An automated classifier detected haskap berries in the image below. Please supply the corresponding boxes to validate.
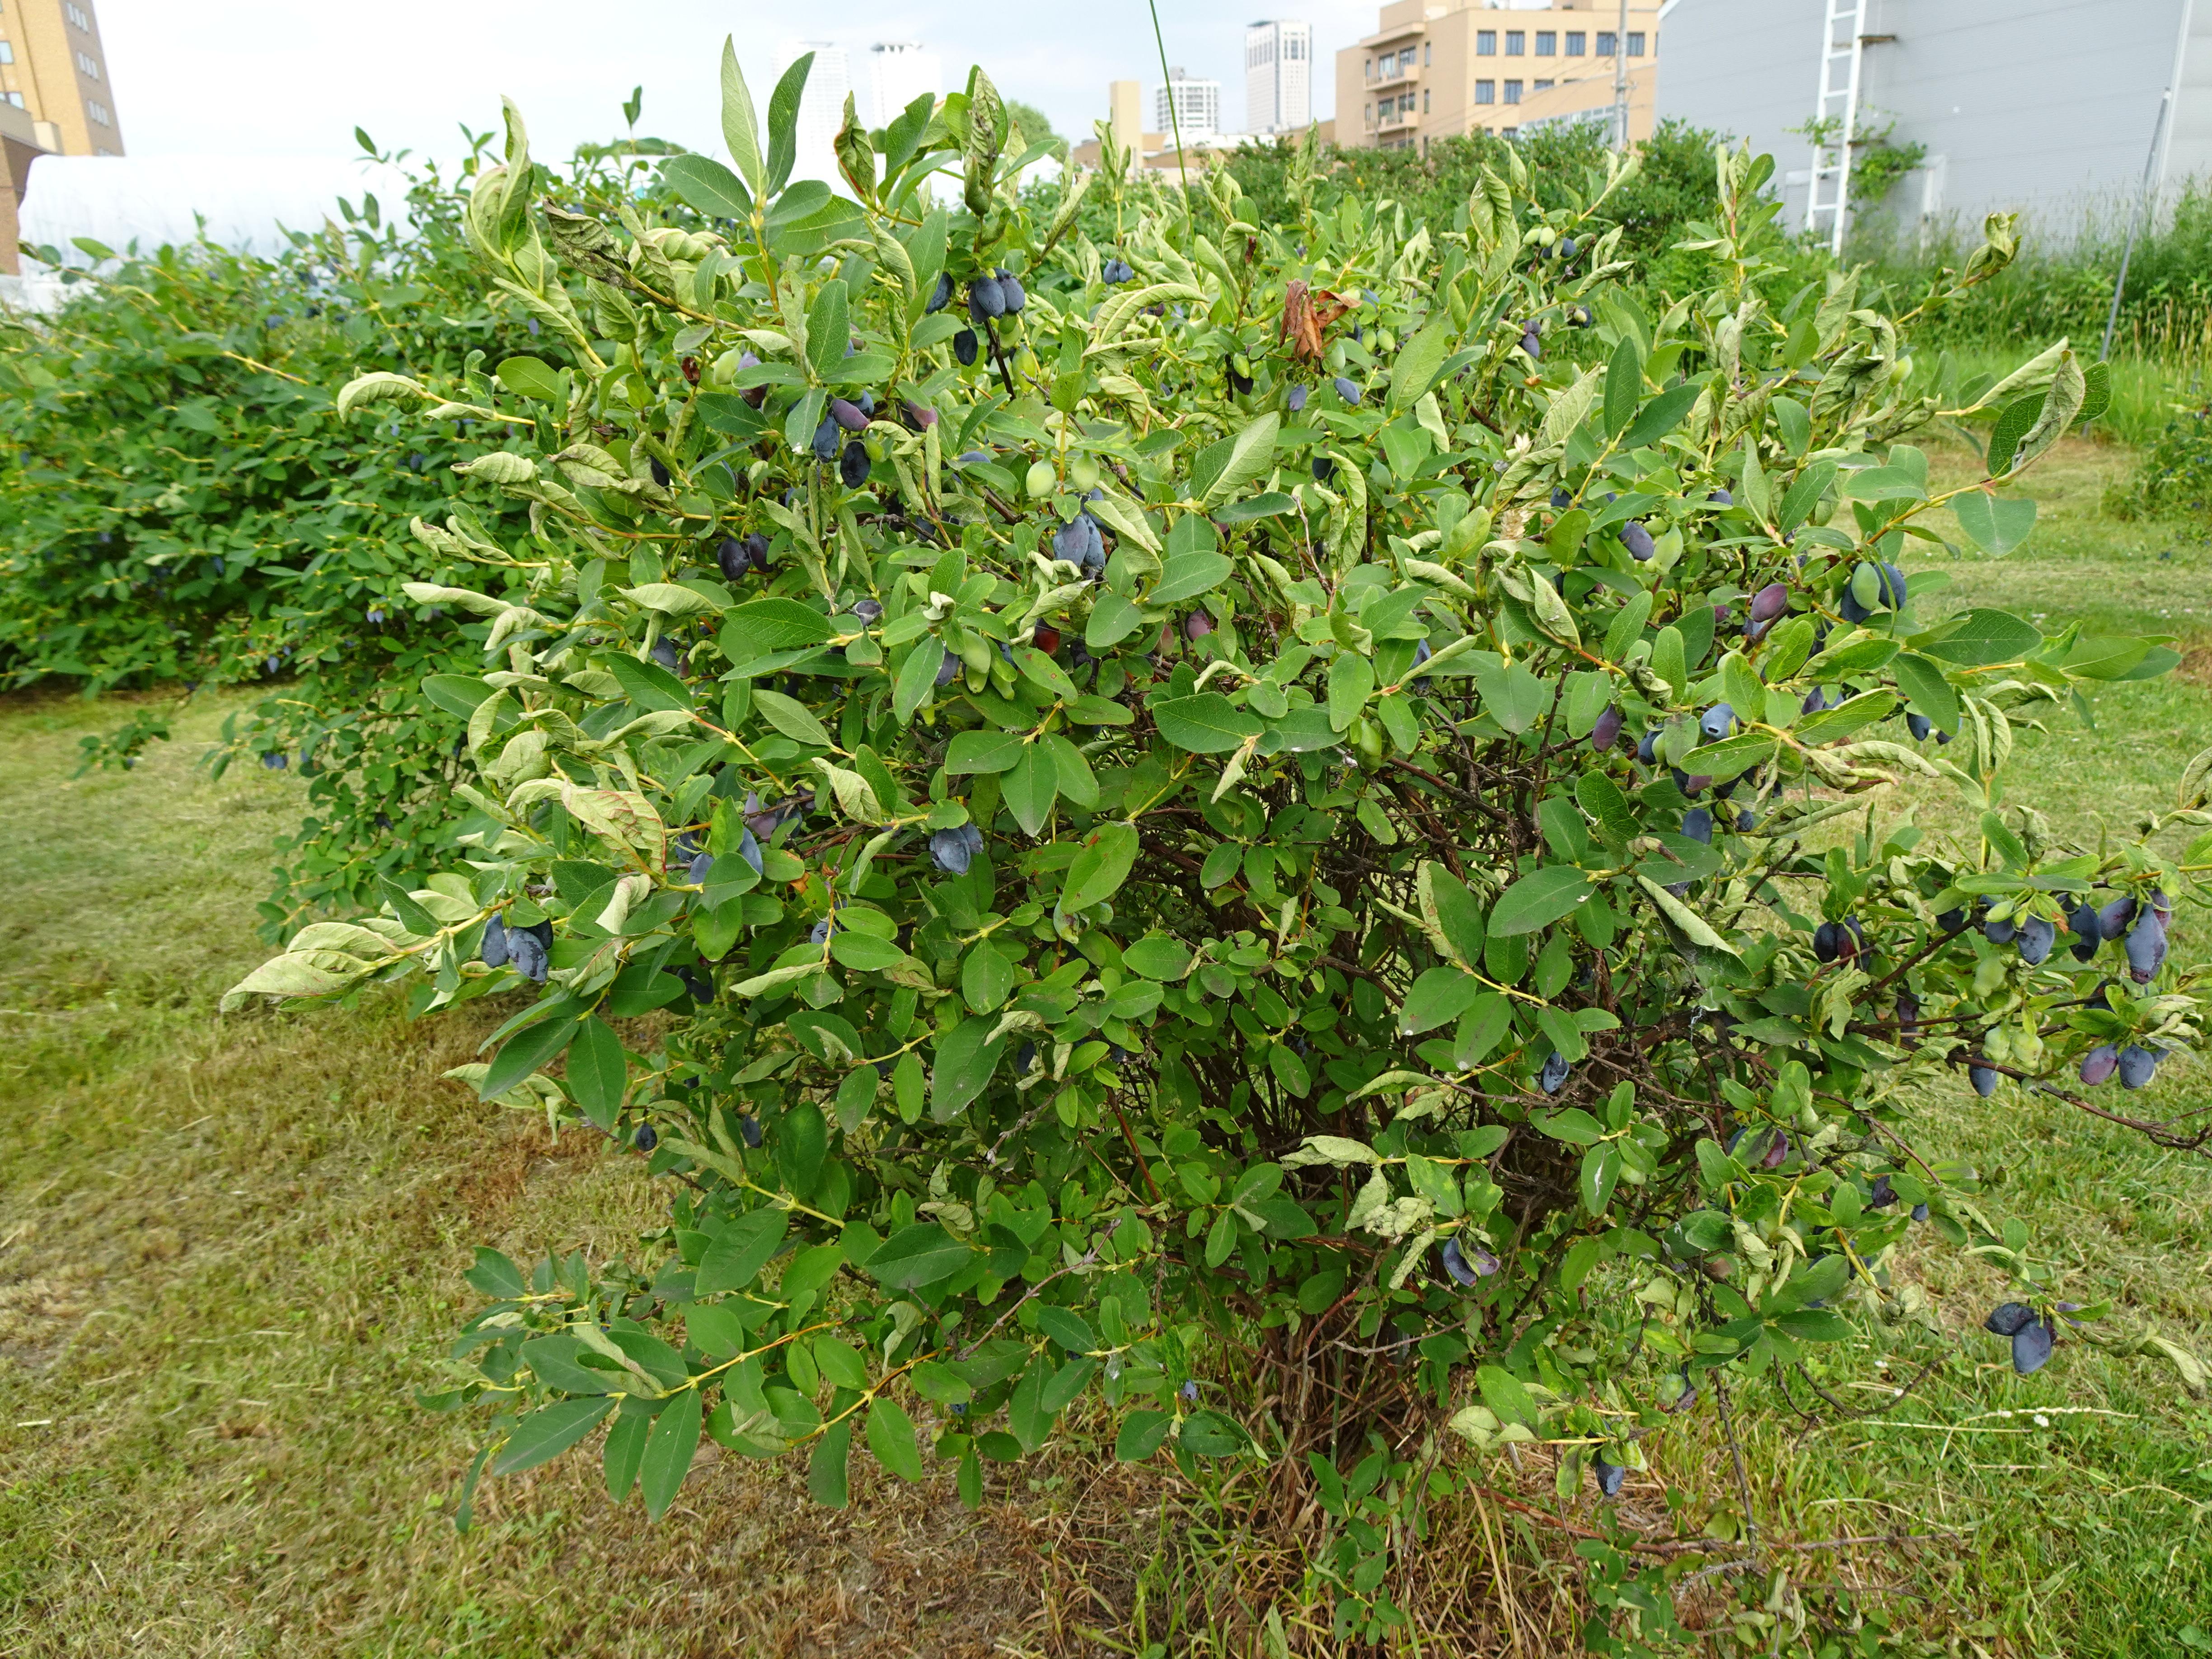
[1552,237,1564,257]
[1638,721,1664,764]
[1555,570,1568,595]
[1171,304,1186,327]
[1482,481,1501,509]
[2125,905,2168,986]
[1852,559,1879,612]
[1081,723,1104,737]
[1075,654,1094,667]
[1286,381,1312,414]
[732,827,766,876]
[1054,902,1085,948]
[1935,904,1968,935]
[1364,288,1381,309]
[2078,1037,2124,1085]
[1649,522,1688,576]
[1155,303,1166,317]
[1473,476,1490,500]
[1982,906,2018,946]
[1758,1129,1790,1170]
[1976,894,1995,912]
[1967,1049,1996,1094]
[1712,488,1735,507]
[1760,661,1771,684]
[1320,513,1332,533]
[1529,321,1542,333]
[933,823,973,876]
[969,280,992,325]
[829,684,845,700]
[1117,261,1134,281]
[795,786,823,812]
[1310,453,1333,481]
[1108,1043,1127,1063]
[1707,600,1735,623]
[741,1115,764,1148]
[1580,309,1592,330]
[1541,246,1555,258]
[586,646,608,674]
[1983,1021,2014,1063]
[853,599,885,625]
[499,929,553,985]
[1519,320,1534,331]
[1727,1125,1754,1153]
[883,822,908,838]
[998,641,1023,678]
[809,919,838,953]
[1660,1371,1687,1400]
[1016,1041,1038,1076]
[1104,258,1118,285]
[1804,688,1828,712]
[2146,887,2169,929]
[920,701,938,729]
[676,964,693,981]
[933,646,965,686]
[1826,691,1846,710]
[1312,256,1332,285]
[1680,525,1701,552]
[1328,344,1348,372]
[1872,1175,1901,1208]
[1256,289,1267,311]
[1841,583,1873,623]
[1889,354,1914,386]
[921,274,961,312]
[1368,460,1393,488]
[1233,370,1255,398]
[1022,449,1063,501]
[959,629,989,673]
[1624,1442,1650,1474]
[1935,718,1959,745]
[748,531,778,574]
[1550,488,1575,517]
[1911,1201,1930,1220]
[1001,322,1024,349]
[2058,1300,2087,1325]
[1538,1052,1572,1093]
[686,1075,701,1091]
[1356,714,1385,756]
[1971,952,2008,999]
[1739,615,1754,638]
[1215,520,1230,532]
[1605,492,1617,502]
[1446,1236,1475,1288]
[1715,775,1744,796]
[1052,515,1090,573]
[1560,238,1579,257]
[1598,1452,1624,1499]
[776,796,806,842]
[1611,755,1635,770]
[1813,917,1841,963]
[523,919,559,950]
[1407,638,1432,689]
[713,434,732,459]
[1734,808,1755,832]
[1464,1240,1502,1276]
[1644,515,1673,531]
[529,318,538,334]
[679,652,694,680]
[949,1401,971,1417]
[1982,1296,2037,1332]
[689,855,718,892]
[743,790,776,838]
[1680,807,1712,852]
[1583,589,1597,605]
[1071,450,1102,494]
[1871,558,1908,614]
[1078,517,1108,568]
[1814,500,1835,525]
[1586,533,1611,568]
[844,319,867,351]
[1265,282,1277,300]
[811,408,839,463]
[478,917,510,972]
[1541,226,1556,247]
[2015,1031,2045,1068]
[865,437,886,466]
[1523,332,1542,360]
[1315,537,1329,562]
[1752,621,1766,641]
[637,1122,658,1151]
[952,327,979,366]
[1362,327,1378,353]
[1338,287,1361,304]
[955,453,993,478]
[675,825,697,860]
[916,516,942,544]
[1619,518,1655,561]
[1745,765,1780,796]
[717,537,751,581]
[2084,978,2123,1011]
[2010,1314,2056,1374]
[1900,1022,1917,1044]
[1757,1204,1781,1240]
[1670,767,1701,799]
[1986,900,2017,921]
[1187,607,1211,641]
[1153,624,1177,659]
[963,821,988,855]
[990,673,1016,705]
[972,274,1005,316]
[1377,328,1397,351]
[1897,984,1922,1023]
[1904,699,1930,741]
[1839,918,1867,961]
[650,636,680,669]
[964,666,991,696]
[1843,1238,1872,1268]
[721,460,738,486]
[646,456,672,492]
[1010,339,1038,393]
[687,625,714,646]
[1747,578,1801,620]
[852,391,878,416]
[2147,1040,2172,1061]
[1618,1160,1650,1186]
[1723,1014,1744,1038]
[994,274,1029,310]
[758,677,774,689]
[737,349,767,413]
[1667,880,1692,894]
[1068,1349,1084,1363]
[2013,912,2059,968]
[1576,310,1587,323]
[885,490,907,532]
[839,441,873,490]
[1232,353,1252,379]
[786,487,803,503]
[2066,900,2103,959]
[828,395,870,432]
[1183,1377,1199,1401]
[1034,616,1063,657]
[2095,895,2135,942]
[1279,381,1296,408]
[711,344,745,387]
[1001,313,1017,335]
[569,615,589,635]
[843,340,854,358]
[694,969,719,1005]
[1687,773,1713,789]
[901,400,939,431]
[2119,1045,2154,1090]
[1333,375,1362,407]
[783,678,799,698]
[1522,221,1543,244]
[1591,703,1620,754]
[1079,487,1108,526]
[1701,702,1736,744]
[1803,1254,1833,1273]
[1652,733,1671,762]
